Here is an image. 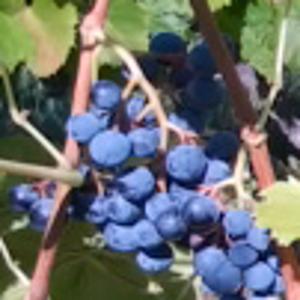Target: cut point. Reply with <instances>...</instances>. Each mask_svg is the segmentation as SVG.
<instances>
[{"label":"cut point","instance_id":"obj_2","mask_svg":"<svg viewBox=\"0 0 300 300\" xmlns=\"http://www.w3.org/2000/svg\"><path fill=\"white\" fill-rule=\"evenodd\" d=\"M247 153H248V149L246 148L245 144L242 143L240 145V150L234 164L233 177L224 181L225 189L235 184L237 195L240 199H243L245 197V192L242 185V178H243V171L245 167Z\"/></svg>","mask_w":300,"mask_h":300},{"label":"cut point","instance_id":"obj_1","mask_svg":"<svg viewBox=\"0 0 300 300\" xmlns=\"http://www.w3.org/2000/svg\"><path fill=\"white\" fill-rule=\"evenodd\" d=\"M100 38L104 39L108 44H110L116 51H118L121 56L128 62V65L135 76L137 82L141 86V88L146 92L149 99L153 102L155 106L156 115L159 119L164 117L163 108L158 100L155 92L153 91L150 82L145 79V76L137 64L136 60L132 57L127 49H125L122 45H120L115 39H113L109 34L102 30Z\"/></svg>","mask_w":300,"mask_h":300}]
</instances>
